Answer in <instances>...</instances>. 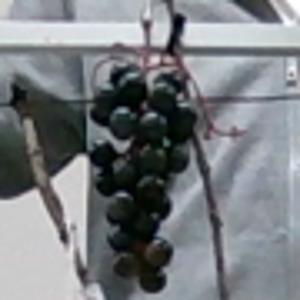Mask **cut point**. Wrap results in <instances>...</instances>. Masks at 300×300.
<instances>
[{"mask_svg":"<svg viewBox=\"0 0 300 300\" xmlns=\"http://www.w3.org/2000/svg\"><path fill=\"white\" fill-rule=\"evenodd\" d=\"M154 26L153 15V0H143V7L139 16V27L143 34V56H142V68L147 72L149 47L151 41V32Z\"/></svg>","mask_w":300,"mask_h":300,"instance_id":"1","label":"cut point"}]
</instances>
